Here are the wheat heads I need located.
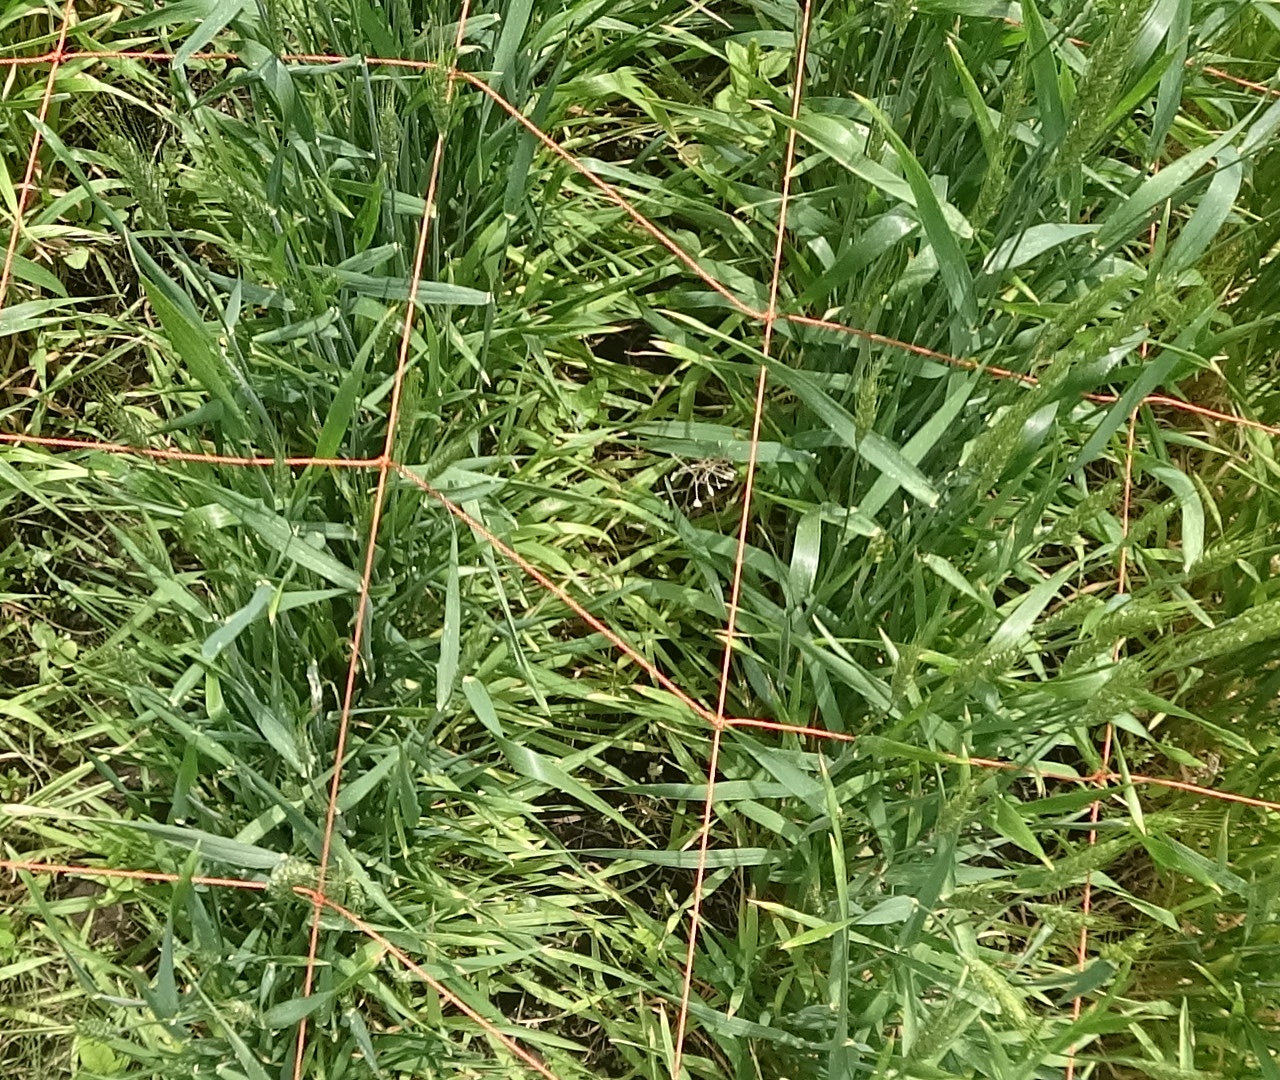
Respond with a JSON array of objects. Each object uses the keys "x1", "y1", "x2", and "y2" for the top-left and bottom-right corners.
[
  {"x1": 858, "y1": 104, "x2": 893, "y2": 164},
  {"x1": 429, "y1": 440, "x2": 471, "y2": 476},
  {"x1": 985, "y1": 645, "x2": 1021, "y2": 685},
  {"x1": 115, "y1": 647, "x2": 140, "y2": 682},
  {"x1": 1043, "y1": 59, "x2": 1128, "y2": 178},
  {"x1": 851, "y1": 374, "x2": 886, "y2": 441},
  {"x1": 1116, "y1": 492, "x2": 1192, "y2": 555},
  {"x1": 269, "y1": 1, "x2": 285, "y2": 53},
  {"x1": 371, "y1": 304, "x2": 400, "y2": 356},
  {"x1": 1094, "y1": 936, "x2": 1149, "y2": 975},
  {"x1": 276, "y1": 862, "x2": 316, "y2": 883},
  {"x1": 1182, "y1": 525, "x2": 1265, "y2": 583},
  {"x1": 1068, "y1": 2, "x2": 1149, "y2": 111},
  {"x1": 1104, "y1": 277, "x2": 1171, "y2": 344},
  {"x1": 1129, "y1": 1056, "x2": 1216, "y2": 1080},
  {"x1": 346, "y1": 876, "x2": 363, "y2": 909},
  {"x1": 1087, "y1": 681, "x2": 1133, "y2": 730},
  {"x1": 938, "y1": 777, "x2": 980, "y2": 829},
  {"x1": 889, "y1": 0, "x2": 912, "y2": 39},
  {"x1": 735, "y1": 37, "x2": 762, "y2": 68},
  {"x1": 888, "y1": 627, "x2": 928, "y2": 702},
  {"x1": 1130, "y1": 811, "x2": 1190, "y2": 833},
  {"x1": 103, "y1": 130, "x2": 161, "y2": 216},
  {"x1": 978, "y1": 426, "x2": 1020, "y2": 496},
  {"x1": 77, "y1": 1017, "x2": 117, "y2": 1039},
  {"x1": 966, "y1": 402, "x2": 1027, "y2": 470},
  {"x1": 1070, "y1": 657, "x2": 1141, "y2": 723},
  {"x1": 1037, "y1": 595, "x2": 1093, "y2": 630},
  {"x1": 380, "y1": 105, "x2": 398, "y2": 159},
  {"x1": 967, "y1": 154, "x2": 1013, "y2": 223},
  {"x1": 1045, "y1": 841, "x2": 1128, "y2": 890},
  {"x1": 214, "y1": 170, "x2": 271, "y2": 213},
  {"x1": 316, "y1": 271, "x2": 340, "y2": 296},
  {"x1": 898, "y1": 1016, "x2": 954, "y2": 1069},
  {"x1": 971, "y1": 952, "x2": 1016, "y2": 1012},
  {"x1": 1040, "y1": 482, "x2": 1114, "y2": 543},
  {"x1": 1056, "y1": 637, "x2": 1114, "y2": 677},
  {"x1": 1174, "y1": 599, "x2": 1280, "y2": 662},
  {"x1": 1085, "y1": 609, "x2": 1163, "y2": 642},
  {"x1": 1041, "y1": 279, "x2": 1117, "y2": 353},
  {"x1": 1017, "y1": 1013, "x2": 1047, "y2": 1068},
  {"x1": 397, "y1": 384, "x2": 423, "y2": 440},
  {"x1": 228, "y1": 997, "x2": 255, "y2": 1021},
  {"x1": 279, "y1": 775, "x2": 304, "y2": 804},
  {"x1": 427, "y1": 62, "x2": 456, "y2": 129},
  {"x1": 137, "y1": 543, "x2": 174, "y2": 573},
  {"x1": 272, "y1": 448, "x2": 290, "y2": 498},
  {"x1": 353, "y1": 501, "x2": 373, "y2": 534},
  {"x1": 946, "y1": 887, "x2": 1000, "y2": 911},
  {"x1": 1031, "y1": 901, "x2": 1098, "y2": 932},
  {"x1": 111, "y1": 404, "x2": 153, "y2": 452}
]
